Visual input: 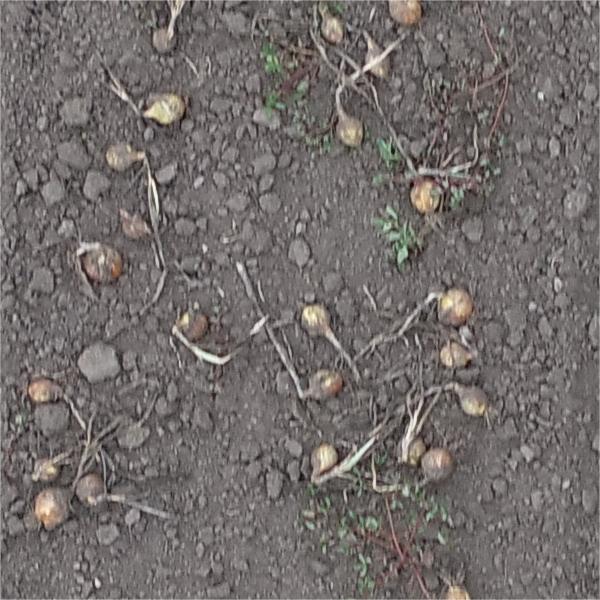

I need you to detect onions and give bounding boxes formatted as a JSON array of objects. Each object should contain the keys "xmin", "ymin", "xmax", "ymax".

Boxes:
[
  {"xmin": 172, "ymin": 306, "xmax": 206, "ymax": 340},
  {"xmin": 311, "ymin": 367, "xmax": 342, "ymax": 397},
  {"xmin": 439, "ymin": 578, "xmax": 469, "ymax": 599},
  {"xmin": 145, "ymin": 92, "xmax": 181, "ymax": 125},
  {"xmin": 457, "ymin": 385, "xmax": 488, "ymax": 416},
  {"xmin": 399, "ymin": 432, "xmax": 426, "ymax": 461},
  {"xmin": 34, "ymin": 455, "xmax": 59, "ymax": 481},
  {"xmin": 333, "ymin": 117, "xmax": 363, "ymax": 148},
  {"xmin": 118, "ymin": 211, "xmax": 144, "ymax": 238},
  {"xmin": 419, "ymin": 444, "xmax": 454, "ymax": 481},
  {"xmin": 388, "ymin": 0, "xmax": 421, "ymax": 27},
  {"xmin": 299, "ymin": 304, "xmax": 328, "ymax": 334},
  {"xmin": 79, "ymin": 241, "xmax": 120, "ymax": 283},
  {"xmin": 151, "ymin": 24, "xmax": 178, "ymax": 57},
  {"xmin": 310, "ymin": 442, "xmax": 337, "ymax": 471},
  {"xmin": 437, "ymin": 341, "xmax": 472, "ymax": 368},
  {"xmin": 364, "ymin": 41, "xmax": 391, "ymax": 77},
  {"xmin": 26, "ymin": 375, "xmax": 58, "ymax": 403},
  {"xmin": 407, "ymin": 178, "xmax": 439, "ymax": 212},
  {"xmin": 104, "ymin": 141, "xmax": 134, "ymax": 169},
  {"xmin": 30, "ymin": 486, "xmax": 67, "ymax": 526},
  {"xmin": 73, "ymin": 471, "xmax": 105, "ymax": 507},
  {"xmin": 317, "ymin": 13, "xmax": 345, "ymax": 41},
  {"xmin": 435, "ymin": 287, "xmax": 472, "ymax": 324}
]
